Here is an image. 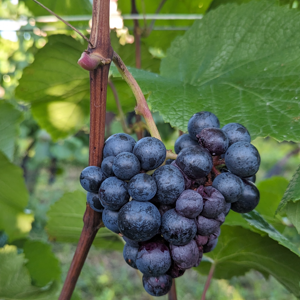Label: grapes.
Masks as SVG:
<instances>
[{"instance_id":"obj_1","label":"grapes","mask_w":300,"mask_h":300,"mask_svg":"<svg viewBox=\"0 0 300 300\" xmlns=\"http://www.w3.org/2000/svg\"><path fill=\"white\" fill-rule=\"evenodd\" d=\"M187 131L174 152L154 137L136 143L114 133L104 142L101 168L87 166L79 175L87 204L122 235L125 262L143 274L154 297L217 247L230 210L249 213L260 201V155L244 125L221 128L214 113L200 111Z\"/></svg>"}]
</instances>
